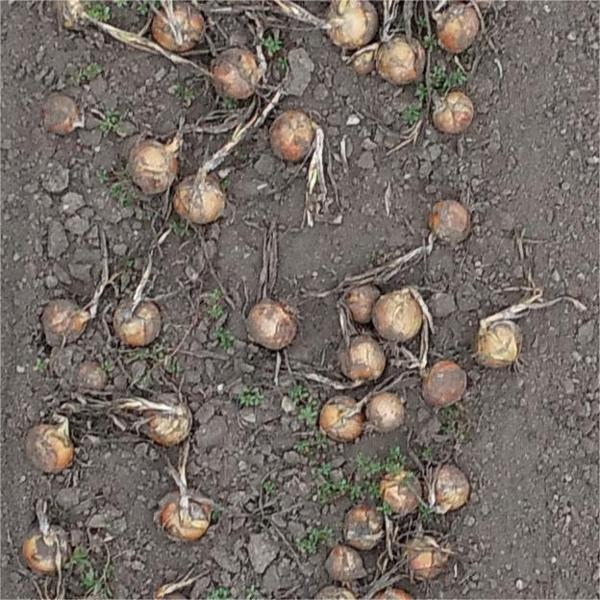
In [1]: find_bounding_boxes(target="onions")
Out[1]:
[48,345,78,376]
[43,302,87,342]
[112,299,157,343]
[317,583,357,600]
[419,359,465,407]
[140,401,189,445]
[475,321,518,366]
[372,290,423,340]
[379,472,420,513]
[341,503,381,548]
[365,391,402,430]
[349,45,378,73]
[376,37,421,82]
[429,87,473,132]
[378,585,410,600]
[404,536,448,578]
[424,200,471,241]
[172,172,224,223]
[20,529,62,571]
[210,47,259,98]
[39,94,77,138]
[151,3,202,48]
[53,0,99,28]
[326,544,364,580]
[127,141,180,196]
[267,109,314,159]
[158,493,211,540]
[433,4,480,49]
[22,420,73,471]
[318,394,363,439]
[246,298,296,348]
[75,359,106,390]
[343,284,378,322]
[342,336,384,377]
[429,464,469,509]
[329,2,375,43]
